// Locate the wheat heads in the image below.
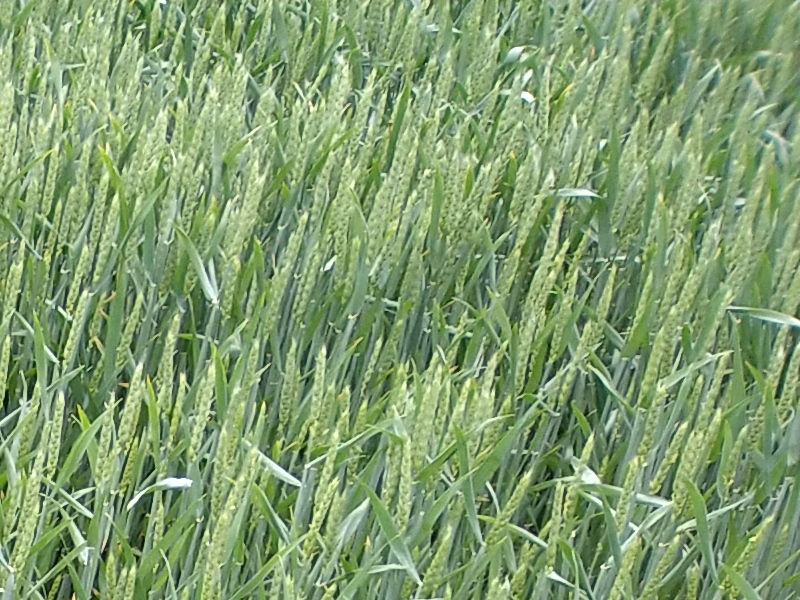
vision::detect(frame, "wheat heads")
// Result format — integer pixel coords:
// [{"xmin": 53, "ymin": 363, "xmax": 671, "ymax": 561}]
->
[
  {"xmin": 71, "ymin": 141, "xmax": 90, "ymax": 233},
  {"xmin": 722, "ymin": 536, "xmax": 756, "ymax": 588},
  {"xmin": 234, "ymin": 471, "xmax": 245, "ymax": 511},
  {"xmin": 114, "ymin": 19, "xmax": 122, "ymax": 53},
  {"xmin": 433, "ymin": 381, "xmax": 452, "ymax": 439},
  {"xmin": 688, "ymin": 567, "xmax": 699, "ymax": 600},
  {"xmin": 158, "ymin": 315, "xmax": 182, "ymax": 379},
  {"xmin": 732, "ymin": 186, "xmax": 762, "ymax": 261},
  {"xmin": 431, "ymin": 378, "xmax": 454, "ymax": 459},
  {"xmin": 194, "ymin": 377, "xmax": 206, "ymax": 406},
  {"xmin": 99, "ymin": 100, "xmax": 110, "ymax": 141},
  {"xmin": 624, "ymin": 120, "xmax": 640, "ymax": 163},
  {"xmin": 182, "ymin": 162, "xmax": 204, "ymax": 235},
  {"xmin": 429, "ymin": 51, "xmax": 452, "ymax": 120},
  {"xmin": 290, "ymin": 368, "xmax": 300, "ymax": 426},
  {"xmin": 768, "ymin": 152, "xmax": 777, "ymax": 166},
  {"xmin": 34, "ymin": 18, "xmax": 48, "ymax": 36},
  {"xmin": 24, "ymin": 179, "xmax": 38, "ymax": 237},
  {"xmin": 594, "ymin": 264, "xmax": 615, "ymax": 347},
  {"xmin": 637, "ymin": 386, "xmax": 665, "ymax": 461},
  {"xmin": 668, "ymin": 241, "xmax": 680, "ymax": 273},
  {"xmin": 443, "ymin": 312, "xmax": 468, "ymax": 375},
  {"xmin": 721, "ymin": 0, "xmax": 737, "ymax": 41},
  {"xmin": 726, "ymin": 165, "xmax": 766, "ymax": 258},
  {"xmin": 516, "ymin": 1, "xmax": 530, "ymax": 41},
  {"xmin": 306, "ymin": 381, "xmax": 335, "ymax": 460},
  {"xmin": 117, "ymin": 33, "xmax": 133, "ymax": 90},
  {"xmin": 397, "ymin": 383, "xmax": 408, "ymax": 413},
  {"xmin": 70, "ymin": 45, "xmax": 96, "ymax": 132},
  {"xmin": 493, "ymin": 75, "xmax": 521, "ymax": 148},
  {"xmin": 444, "ymin": 65, "xmax": 455, "ymax": 104},
  {"xmin": 746, "ymin": 400, "xmax": 766, "ymax": 455},
  {"xmin": 399, "ymin": 247, "xmax": 418, "ymax": 296},
  {"xmin": 529, "ymin": 310, "xmax": 547, "ymax": 378},
  {"xmin": 697, "ymin": 0, "xmax": 717, "ymax": 50},
  {"xmin": 47, "ymin": 573, "xmax": 62, "ymax": 600},
  {"xmin": 340, "ymin": 387, "xmax": 349, "ymax": 441},
  {"xmin": 19, "ymin": 103, "xmax": 28, "ymax": 161},
  {"xmin": 546, "ymin": 480, "xmax": 565, "ymax": 568},
  {"xmin": 409, "ymin": 0, "xmax": 430, "ymax": 59},
  {"xmin": 118, "ymin": 4, "xmax": 127, "ymax": 24},
  {"xmin": 309, "ymin": 191, "xmax": 322, "ymax": 233},
  {"xmin": 498, "ymin": 97, "xmax": 521, "ymax": 158},
  {"xmin": 650, "ymin": 421, "xmax": 688, "ymax": 493},
  {"xmin": 667, "ymin": 177, "xmax": 689, "ymax": 237},
  {"xmin": 672, "ymin": 434, "xmax": 700, "ymax": 517},
  {"xmin": 544, "ymin": 54, "xmax": 556, "ymax": 72},
  {"xmin": 559, "ymin": 321, "xmax": 590, "ymax": 405},
  {"xmin": 682, "ymin": 56, "xmax": 701, "ymax": 107},
  {"xmin": 749, "ymin": 192, "xmax": 770, "ymax": 279},
  {"xmin": 435, "ymin": 141, "xmax": 448, "ymax": 175},
  {"xmin": 409, "ymin": 255, "xmax": 423, "ymax": 311},
  {"xmin": 279, "ymin": 336, "xmax": 297, "ymax": 427},
  {"xmin": 160, "ymin": 233, "xmax": 180, "ymax": 293},
  {"xmin": 718, "ymin": 324, "xmax": 730, "ymax": 352},
  {"xmin": 132, "ymin": 57, "xmax": 143, "ymax": 93},
  {"xmin": 271, "ymin": 271, "xmax": 279, "ymax": 294},
  {"xmin": 180, "ymin": 106, "xmax": 209, "ymax": 189},
  {"xmin": 62, "ymin": 288, "xmax": 89, "ymax": 370},
  {"xmin": 543, "ymin": 57, "xmax": 587, "ymax": 176},
  {"xmin": 474, "ymin": 84, "xmax": 500, "ymax": 146},
  {"xmin": 544, "ymin": 201, "xmax": 563, "ymax": 254},
  {"xmin": 503, "ymin": 251, "xmax": 519, "ymax": 292},
  {"xmin": 53, "ymin": 119, "xmax": 64, "ymax": 150},
  {"xmin": 39, "ymin": 29, "xmax": 51, "ymax": 72},
  {"xmin": 566, "ymin": 229, "xmax": 591, "ymax": 280},
  {"xmin": 528, "ymin": 520, "xmax": 553, "ymax": 563},
  {"xmin": 440, "ymin": 379, "xmax": 470, "ymax": 453},
  {"xmin": 311, "ymin": 386, "xmax": 336, "ymax": 450},
  {"xmin": 71, "ymin": 190, "xmax": 90, "ymax": 239},
  {"xmin": 394, "ymin": 140, "xmax": 418, "ymax": 216},
  {"xmin": 384, "ymin": 446, "xmax": 403, "ymax": 498},
  {"xmin": 510, "ymin": 149, "xmax": 534, "ymax": 222},
  {"xmin": 565, "ymin": 433, "xmax": 594, "ymax": 517},
  {"xmin": 596, "ymin": 0, "xmax": 613, "ymax": 32},
  {"xmin": 213, "ymin": 579, "xmax": 222, "ymax": 600},
  {"xmin": 261, "ymin": 64, "xmax": 272, "ymax": 96},
  {"xmin": 696, "ymin": 355, "xmax": 729, "ymax": 433},
  {"xmin": 332, "ymin": 65, "xmax": 348, "ymax": 125},
  {"xmin": 578, "ymin": 148, "xmax": 596, "ymax": 189},
  {"xmin": 768, "ymin": 524, "xmax": 790, "ymax": 578},
  {"xmin": 630, "ymin": 270, "xmax": 652, "ymax": 339},
  {"xmin": 385, "ymin": 5, "xmax": 408, "ymax": 61},
  {"xmin": 638, "ymin": 533, "xmax": 679, "ymax": 600},
  {"xmin": 191, "ymin": 28, "xmax": 206, "ymax": 76},
  {"xmin": 697, "ymin": 408, "xmax": 722, "ymax": 472},
  {"xmin": 618, "ymin": 129, "xmax": 635, "ymax": 168},
  {"xmin": 119, "ymin": 437, "xmax": 139, "ymax": 491},
  {"xmin": 548, "ymin": 299, "xmax": 567, "ymax": 359},
  {"xmin": 523, "ymin": 169, "xmax": 540, "ymax": 226},
  {"xmin": 655, "ymin": 250, "xmax": 685, "ymax": 324},
  {"xmin": 658, "ymin": 151, "xmax": 671, "ymax": 184},
  {"xmin": 439, "ymin": 197, "xmax": 470, "ymax": 282},
  {"xmin": 293, "ymin": 244, "xmax": 320, "ymax": 320},
  {"xmin": 242, "ymin": 160, "xmax": 259, "ymax": 219},
  {"xmin": 360, "ymin": 338, "xmax": 381, "ymax": 394},
  {"xmin": 286, "ymin": 99, "xmax": 301, "ymax": 155},
  {"xmin": 212, "ymin": 428, "xmax": 228, "ymax": 518},
  {"xmin": 603, "ymin": 535, "xmax": 640, "ymax": 600},
  {"xmin": 172, "ymin": 64, "xmax": 183, "ymax": 97},
  {"xmin": 540, "ymin": 370, "xmax": 563, "ymax": 427},
  {"xmin": 423, "ymin": 352, "xmax": 438, "ymax": 390},
  {"xmin": 537, "ymin": 0, "xmax": 549, "ymax": 24},
  {"xmin": 46, "ymin": 389, "xmax": 68, "ymax": 483},
  {"xmin": 637, "ymin": 4, "xmax": 657, "ymax": 65},
  {"xmin": 0, "ymin": 124, "xmax": 17, "ymax": 194},
  {"xmin": 44, "ymin": 143, "xmax": 60, "ymax": 213},
  {"xmin": 127, "ymin": 125, "xmax": 147, "ymax": 204},
  {"xmin": 686, "ymin": 373, "xmax": 704, "ymax": 417},
  {"xmin": 366, "ymin": 179, "xmax": 387, "ymax": 262},
  {"xmin": 677, "ymin": 157, "xmax": 701, "ymax": 231},
  {"xmin": 168, "ymin": 22, "xmax": 185, "ymax": 73},
  {"xmin": 191, "ymin": 0, "xmax": 205, "ymax": 28},
  {"xmin": 87, "ymin": 171, "xmax": 109, "ymax": 276},
  {"xmin": 377, "ymin": 320, "xmax": 402, "ymax": 387},
  {"xmin": 566, "ymin": 270, "xmax": 579, "ymax": 307},
  {"xmin": 678, "ymin": 136, "xmax": 693, "ymax": 165},
  {"xmin": 581, "ymin": 49, "xmax": 606, "ymax": 121},
  {"xmin": 25, "ymin": 76, "xmax": 45, "ymax": 159},
  {"xmin": 225, "ymin": 387, "xmax": 242, "ymax": 425},
  {"xmin": 1, "ymin": 0, "xmax": 14, "ymax": 26},
  {"xmin": 587, "ymin": 294, "xmax": 604, "ymax": 347},
  {"xmin": 700, "ymin": 288, "xmax": 732, "ymax": 355},
  {"xmin": 234, "ymin": 206, "xmax": 241, "ymax": 235},
  {"xmin": 189, "ymin": 76, "xmax": 208, "ymax": 124},
  {"xmin": 581, "ymin": 128, "xmax": 592, "ymax": 154},
  {"xmin": 520, "ymin": 538, "xmax": 529, "ymax": 596},
  {"xmin": 620, "ymin": 182, "xmax": 648, "ymax": 234},
  {"xmin": 286, "ymin": 22, "xmax": 315, "ymax": 113},
  {"xmin": 612, "ymin": 382, "xmax": 633, "ymax": 438},
  {"xmin": 204, "ymin": 1, "xmax": 220, "ymax": 27},
  {"xmin": 400, "ymin": 545, "xmax": 419, "ymax": 600},
  {"xmin": 243, "ymin": 140, "xmax": 253, "ymax": 162},
  {"xmin": 225, "ymin": 57, "xmax": 242, "ymax": 105},
  {"xmin": 303, "ymin": 477, "xmax": 339, "ymax": 558},
  {"xmin": 267, "ymin": 128, "xmax": 277, "ymax": 174},
  {"xmin": 640, "ymin": 108, "xmax": 648, "ymax": 149},
  {"xmin": 341, "ymin": 235, "xmax": 361, "ymax": 304},
  {"xmin": 391, "ymin": 197, "xmax": 412, "ymax": 265},
  {"xmin": 478, "ymin": 41, "xmax": 499, "ymax": 93},
  {"xmin": 221, "ymin": 260, "xmax": 242, "ymax": 324},
  {"xmin": 198, "ymin": 5, "xmax": 224, "ymax": 73},
  {"xmin": 523, "ymin": 256, "xmax": 550, "ymax": 311},
  {"xmin": 555, "ymin": 240, "xmax": 569, "ymax": 277},
  {"xmin": 463, "ymin": 211, "xmax": 479, "ymax": 283},
  {"xmin": 516, "ymin": 317, "xmax": 535, "ymax": 392},
  {"xmin": 733, "ymin": 100, "xmax": 757, "ymax": 160},
  {"xmin": 613, "ymin": 62, "xmax": 629, "ymax": 113},
  {"xmin": 292, "ymin": 106, "xmax": 317, "ymax": 187},
  {"xmin": 753, "ymin": 141, "xmax": 775, "ymax": 186},
  {"xmin": 305, "ymin": 583, "xmax": 337, "ymax": 600},
  {"xmin": 333, "ymin": 189, "xmax": 353, "ymax": 281},
  {"xmin": 459, "ymin": 14, "xmax": 469, "ymax": 37},
  {"xmin": 189, "ymin": 363, "xmax": 217, "ymax": 462},
  {"xmin": 551, "ymin": 45, "xmax": 573, "ymax": 95},
  {"xmin": 693, "ymin": 114, "xmax": 703, "ymax": 157},
  {"xmin": 111, "ymin": 568, "xmax": 129, "ymax": 600},
  {"xmin": 299, "ymin": 61, "xmax": 327, "ymax": 119},
  {"xmin": 105, "ymin": 552, "xmax": 117, "ymax": 600},
  {"xmin": 387, "ymin": 128, "xmax": 410, "ymax": 189},
  {"xmin": 669, "ymin": 85, "xmax": 683, "ymax": 109},
  {"xmin": 335, "ymin": 412, "xmax": 348, "ymax": 436},
  {"xmin": 3, "ymin": 261, "xmax": 23, "ymax": 322},
  {"xmin": 215, "ymin": 65, "xmax": 222, "ymax": 93},
  {"xmin": 769, "ymin": 322, "xmax": 789, "ymax": 368},
  {"xmin": 741, "ymin": 399, "xmax": 766, "ymax": 469},
  {"xmin": 310, "ymin": 149, "xmax": 333, "ymax": 231},
  {"xmin": 175, "ymin": 102, "xmax": 182, "ymax": 154},
  {"xmin": 125, "ymin": 90, "xmax": 141, "ymax": 137},
  {"xmin": 117, "ymin": 293, "xmax": 143, "ymax": 367},
  {"xmin": 548, "ymin": 0, "xmax": 562, "ymax": 33},
  {"xmin": 638, "ymin": 328, "xmax": 664, "ymax": 401},
  {"xmin": 322, "ymin": 18, "xmax": 337, "ymax": 51},
  {"xmin": 67, "ymin": 245, "xmax": 90, "ymax": 312},
  {"xmin": 313, "ymin": 98, "xmax": 326, "ymax": 135},
  {"xmin": 150, "ymin": 0, "xmax": 161, "ymax": 45},
  {"xmin": 52, "ymin": 0, "xmax": 70, "ymax": 40},
  {"xmin": 437, "ymin": 1, "xmax": 450, "ymax": 43},
  {"xmin": 226, "ymin": 404, "xmax": 242, "ymax": 456},
  {"xmin": 699, "ymin": 410, "xmax": 721, "ymax": 460},
  {"xmin": 153, "ymin": 503, "xmax": 165, "ymax": 550},
  {"xmin": 539, "ymin": 68, "xmax": 549, "ymax": 144},
  {"xmin": 287, "ymin": 231, "xmax": 296, "ymax": 251},
  {"xmin": 702, "ymin": 91, "xmax": 717, "ymax": 133},
  {"xmin": 647, "ymin": 30, "xmax": 671, "ymax": 95},
  {"xmin": 37, "ymin": 251, "xmax": 51, "ymax": 304},
  {"xmin": 469, "ymin": 37, "xmax": 490, "ymax": 91},
  {"xmin": 777, "ymin": 344, "xmax": 800, "ymax": 422},
  {"xmin": 411, "ymin": 385, "xmax": 431, "ymax": 464},
  {"xmin": 497, "ymin": 169, "xmax": 555, "ymax": 289},
  {"xmin": 724, "ymin": 425, "xmax": 748, "ymax": 479},
  {"xmin": 533, "ymin": 270, "xmax": 557, "ymax": 318},
  {"xmin": 510, "ymin": 563, "xmax": 525, "ymax": 592},
  {"xmin": 238, "ymin": 0, "xmax": 247, "ymax": 16},
  {"xmin": 15, "ymin": 470, "xmax": 38, "ymax": 541},
  {"xmin": 95, "ymin": 61, "xmax": 108, "ymax": 99},
  {"xmin": 185, "ymin": 214, "xmax": 216, "ymax": 290},
  {"xmin": 25, "ymin": 235, "xmax": 43, "ymax": 295},
  {"xmin": 481, "ymin": 158, "xmax": 501, "ymax": 217},
  {"xmin": 729, "ymin": 88, "xmax": 743, "ymax": 120},
  {"xmin": 158, "ymin": 165, "xmax": 181, "ymax": 238},
  {"xmin": 389, "ymin": 92, "xmax": 403, "ymax": 127},
  {"xmin": 148, "ymin": 113, "xmax": 168, "ymax": 193},
  {"xmin": 93, "ymin": 391, "xmax": 115, "ymax": 488},
  {"xmin": 19, "ymin": 18, "xmax": 33, "ymax": 77},
  {"xmin": 129, "ymin": 382, "xmax": 146, "ymax": 439},
  {"xmin": 598, "ymin": 455, "xmax": 609, "ymax": 481},
  {"xmin": 438, "ymin": 151, "xmax": 461, "ymax": 233},
  {"xmin": 416, "ymin": 205, "xmax": 433, "ymax": 253},
  {"xmin": 425, "ymin": 110, "xmax": 439, "ymax": 155},
  {"xmin": 329, "ymin": 487, "xmax": 349, "ymax": 554},
  {"xmin": 163, "ymin": 99, "xmax": 190, "ymax": 171},
  {"xmin": 397, "ymin": 441, "xmax": 413, "ymax": 530},
  {"xmin": 386, "ymin": 365, "xmax": 403, "ymax": 419},
  {"xmin": 58, "ymin": 33, "xmax": 68, "ymax": 67},
  {"xmin": 232, "ymin": 13, "xmax": 242, "ymax": 51},
  {"xmin": 243, "ymin": 447, "xmax": 256, "ymax": 490},
  {"xmin": 647, "ymin": 94, "xmax": 668, "ymax": 149},
  {"xmin": 381, "ymin": 4, "xmax": 421, "ymax": 88},
  {"xmin": 104, "ymin": 451, "xmax": 115, "ymax": 480},
  {"xmin": 88, "ymin": 26, "xmax": 111, "ymax": 112},
  {"xmin": 375, "ymin": 5, "xmax": 395, "ymax": 65},
  {"xmin": 13, "ymin": 503, "xmax": 38, "ymax": 579},
  {"xmin": 252, "ymin": 89, "xmax": 271, "ymax": 127},
  {"xmin": 488, "ymin": 397, "xmax": 512, "ymax": 445},
  {"xmin": 721, "ymin": 65, "xmax": 742, "ymax": 114},
  {"xmin": 484, "ymin": 470, "xmax": 531, "ymax": 549},
  {"xmin": 223, "ymin": 491, "xmax": 234, "ymax": 520},
  {"xmin": 718, "ymin": 382, "xmax": 734, "ymax": 420},
  {"xmin": 230, "ymin": 180, "xmax": 264, "ymax": 262},
  {"xmin": 783, "ymin": 267, "xmax": 800, "ymax": 312},
  {"xmin": 118, "ymin": 350, "xmax": 146, "ymax": 442},
  {"xmin": 199, "ymin": 516, "xmax": 226, "ymax": 600},
  {"xmin": 245, "ymin": 272, "xmax": 259, "ymax": 323},
  {"xmin": 207, "ymin": 89, "xmax": 216, "ymax": 167},
  {"xmin": 589, "ymin": 58, "xmax": 618, "ymax": 144},
  {"xmin": 429, "ymin": 5, "xmax": 436, "ymax": 24},
  {"xmin": 643, "ymin": 192, "xmax": 663, "ymax": 263},
  {"xmin": 255, "ymin": 1, "xmax": 272, "ymax": 62},
  {"xmin": 24, "ymin": 35, "xmax": 36, "ymax": 92},
  {"xmin": 250, "ymin": 466, "xmax": 269, "ymax": 524},
  {"xmin": 316, "ymin": 431, "xmax": 341, "ymax": 510},
  {"xmin": 687, "ymin": 225, "xmax": 715, "ymax": 309},
  {"xmin": 329, "ymin": 156, "xmax": 353, "ymax": 229},
  {"xmin": 674, "ymin": 269, "xmax": 693, "ymax": 324},
  {"xmin": 364, "ymin": 180, "xmax": 376, "ymax": 215},
  {"xmin": 120, "ymin": 564, "xmax": 136, "ymax": 600},
  {"xmin": 377, "ymin": 127, "xmax": 389, "ymax": 162},
  {"xmin": 728, "ymin": 583, "xmax": 743, "ymax": 600},
  {"xmin": 241, "ymin": 340, "xmax": 260, "ymax": 404},
  {"xmin": 452, "ymin": 391, "xmax": 479, "ymax": 476},
  {"xmin": 479, "ymin": 577, "xmax": 499, "ymax": 600},
  {"xmin": 227, "ymin": 163, "xmax": 237, "ymax": 194},
  {"xmin": 137, "ymin": 121, "xmax": 158, "ymax": 194},
  {"xmin": 194, "ymin": 529, "xmax": 210, "ymax": 574},
  {"xmin": 287, "ymin": 212, "xmax": 308, "ymax": 269},
  {"xmin": 218, "ymin": 66, "xmax": 228, "ymax": 107},
  {"xmin": 435, "ymin": 497, "xmax": 465, "ymax": 548},
  {"xmin": 297, "ymin": 417, "xmax": 311, "ymax": 451},
  {"xmin": 587, "ymin": 264, "xmax": 618, "ymax": 353},
  {"xmin": 561, "ymin": 0, "xmax": 576, "ymax": 39},
  {"xmin": 233, "ymin": 106, "xmax": 246, "ymax": 147},
  {"xmin": 616, "ymin": 456, "xmax": 638, "ymax": 536},
  {"xmin": 90, "ymin": 291, "xmax": 107, "ymax": 339},
  {"xmin": 413, "ymin": 58, "xmax": 439, "ymax": 119},
  {"xmin": 607, "ymin": 153, "xmax": 634, "ymax": 225},
  {"xmin": 717, "ymin": 65, "xmax": 740, "ymax": 128},
  {"xmin": 768, "ymin": 345, "xmax": 787, "ymax": 398},
  {"xmin": 326, "ymin": 489, "xmax": 341, "ymax": 534},
  {"xmin": 1, "ymin": 31, "xmax": 16, "ymax": 84},
  {"xmin": 720, "ymin": 515, "xmax": 776, "ymax": 590},
  {"xmin": 229, "ymin": 65, "xmax": 246, "ymax": 109},
  {"xmin": 538, "ymin": 376, "xmax": 560, "ymax": 425},
  {"xmin": 411, "ymin": 171, "xmax": 431, "ymax": 204},
  {"xmin": 657, "ymin": 37, "xmax": 675, "ymax": 88},
  {"xmin": 226, "ymin": 71, "xmax": 249, "ymax": 153},
  {"xmin": 773, "ymin": 248, "xmax": 799, "ymax": 305},
  {"xmin": 348, "ymin": 85, "xmax": 371, "ymax": 159},
  {"xmin": 168, "ymin": 373, "xmax": 186, "ymax": 444},
  {"xmin": 635, "ymin": 66, "xmax": 652, "ymax": 97},
  {"xmin": 7, "ymin": 88, "xmax": 14, "ymax": 123},
  {"xmin": 0, "ymin": 82, "xmax": 10, "ymax": 163},
  {"xmin": 369, "ymin": 0, "xmax": 385, "ymax": 47},
  {"xmin": 494, "ymin": 121, "xmax": 522, "ymax": 191},
  {"xmin": 103, "ymin": 4, "xmax": 119, "ymax": 38},
  {"xmin": 267, "ymin": 558, "xmax": 284, "ymax": 600},
  {"xmin": 91, "ymin": 189, "xmax": 121, "ymax": 282},
  {"xmin": 56, "ymin": 188, "xmax": 74, "ymax": 256},
  {"xmin": 762, "ymin": 26, "xmax": 784, "ymax": 89},
  {"xmin": 450, "ymin": 132, "xmax": 460, "ymax": 159},
  {"xmin": 719, "ymin": 159, "xmax": 739, "ymax": 216},
  {"xmin": 75, "ymin": 6, "xmax": 94, "ymax": 55},
  {"xmin": 90, "ymin": 350, "xmax": 106, "ymax": 390},
  {"xmin": 730, "ymin": 228, "xmax": 752, "ymax": 301},
  {"xmin": 257, "ymin": 117, "xmax": 272, "ymax": 164},
  {"xmin": 223, "ymin": 209, "xmax": 235, "ymax": 249},
  {"xmin": 70, "ymin": 13, "xmax": 79, "ymax": 44},
  {"xmin": 672, "ymin": 430, "xmax": 694, "ymax": 490},
  {"xmin": 360, "ymin": 112, "xmax": 374, "ymax": 173},
  {"xmin": 414, "ymin": 364, "xmax": 442, "ymax": 470},
  {"xmin": 347, "ymin": 401, "xmax": 367, "ymax": 487},
  {"xmin": 17, "ymin": 382, "xmax": 41, "ymax": 459},
  {"xmin": 365, "ymin": 69, "xmax": 377, "ymax": 87},
  {"xmin": 368, "ymin": 94, "xmax": 387, "ymax": 149},
  {"xmin": 418, "ymin": 532, "xmax": 449, "ymax": 597},
  {"xmin": 454, "ymin": 264, "xmax": 468, "ymax": 294},
  {"xmin": 126, "ymin": 197, "xmax": 142, "ymax": 265},
  {"xmin": 397, "ymin": 107, "xmax": 413, "ymax": 146},
  {"xmin": 361, "ymin": 4, "xmax": 376, "ymax": 41},
  {"xmin": 43, "ymin": 200, "xmax": 63, "ymax": 264},
  {"xmin": 660, "ymin": 306, "xmax": 677, "ymax": 382},
  {"xmin": 265, "ymin": 91, "xmax": 275, "ymax": 123},
  {"xmin": 118, "ymin": 80, "xmax": 133, "ymax": 123},
  {"xmin": 771, "ymin": 219, "xmax": 800, "ymax": 289},
  {"xmin": 608, "ymin": 15, "xmax": 624, "ymax": 59},
  {"xmin": 87, "ymin": 19, "xmax": 99, "ymax": 51},
  {"xmin": 600, "ymin": 33, "xmax": 634, "ymax": 107},
  {"xmin": 31, "ymin": 450, "xmax": 46, "ymax": 479},
  {"xmin": 295, "ymin": 367, "xmax": 301, "ymax": 398},
  {"xmin": 678, "ymin": 231, "xmax": 692, "ymax": 278},
  {"xmin": 165, "ymin": 0, "xmax": 182, "ymax": 37},
  {"xmin": 446, "ymin": 164, "xmax": 486, "ymax": 244},
  {"xmin": 493, "ymin": 340, "xmax": 509, "ymax": 364},
  {"xmin": 466, "ymin": 0, "xmax": 486, "ymax": 64},
  {"xmin": 158, "ymin": 332, "xmax": 174, "ymax": 409},
  {"xmin": 17, "ymin": 239, "xmax": 27, "ymax": 263},
  {"xmin": 264, "ymin": 267, "xmax": 288, "ymax": 333},
  {"xmin": 426, "ymin": 379, "xmax": 471, "ymax": 500},
  {"xmin": 325, "ymin": 75, "xmax": 338, "ymax": 123},
  {"xmin": 312, "ymin": 343, "xmax": 328, "ymax": 421},
  {"xmin": 446, "ymin": 157, "xmax": 469, "ymax": 232},
  {"xmin": 286, "ymin": 27, "xmax": 299, "ymax": 88},
  {"xmin": 567, "ymin": 147, "xmax": 583, "ymax": 194},
  {"xmin": 482, "ymin": 386, "xmax": 496, "ymax": 449},
  {"xmin": 0, "ymin": 335, "xmax": 10, "ymax": 408},
  {"xmin": 658, "ymin": 124, "xmax": 677, "ymax": 162},
  {"xmin": 580, "ymin": 0, "xmax": 601, "ymax": 37}
]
